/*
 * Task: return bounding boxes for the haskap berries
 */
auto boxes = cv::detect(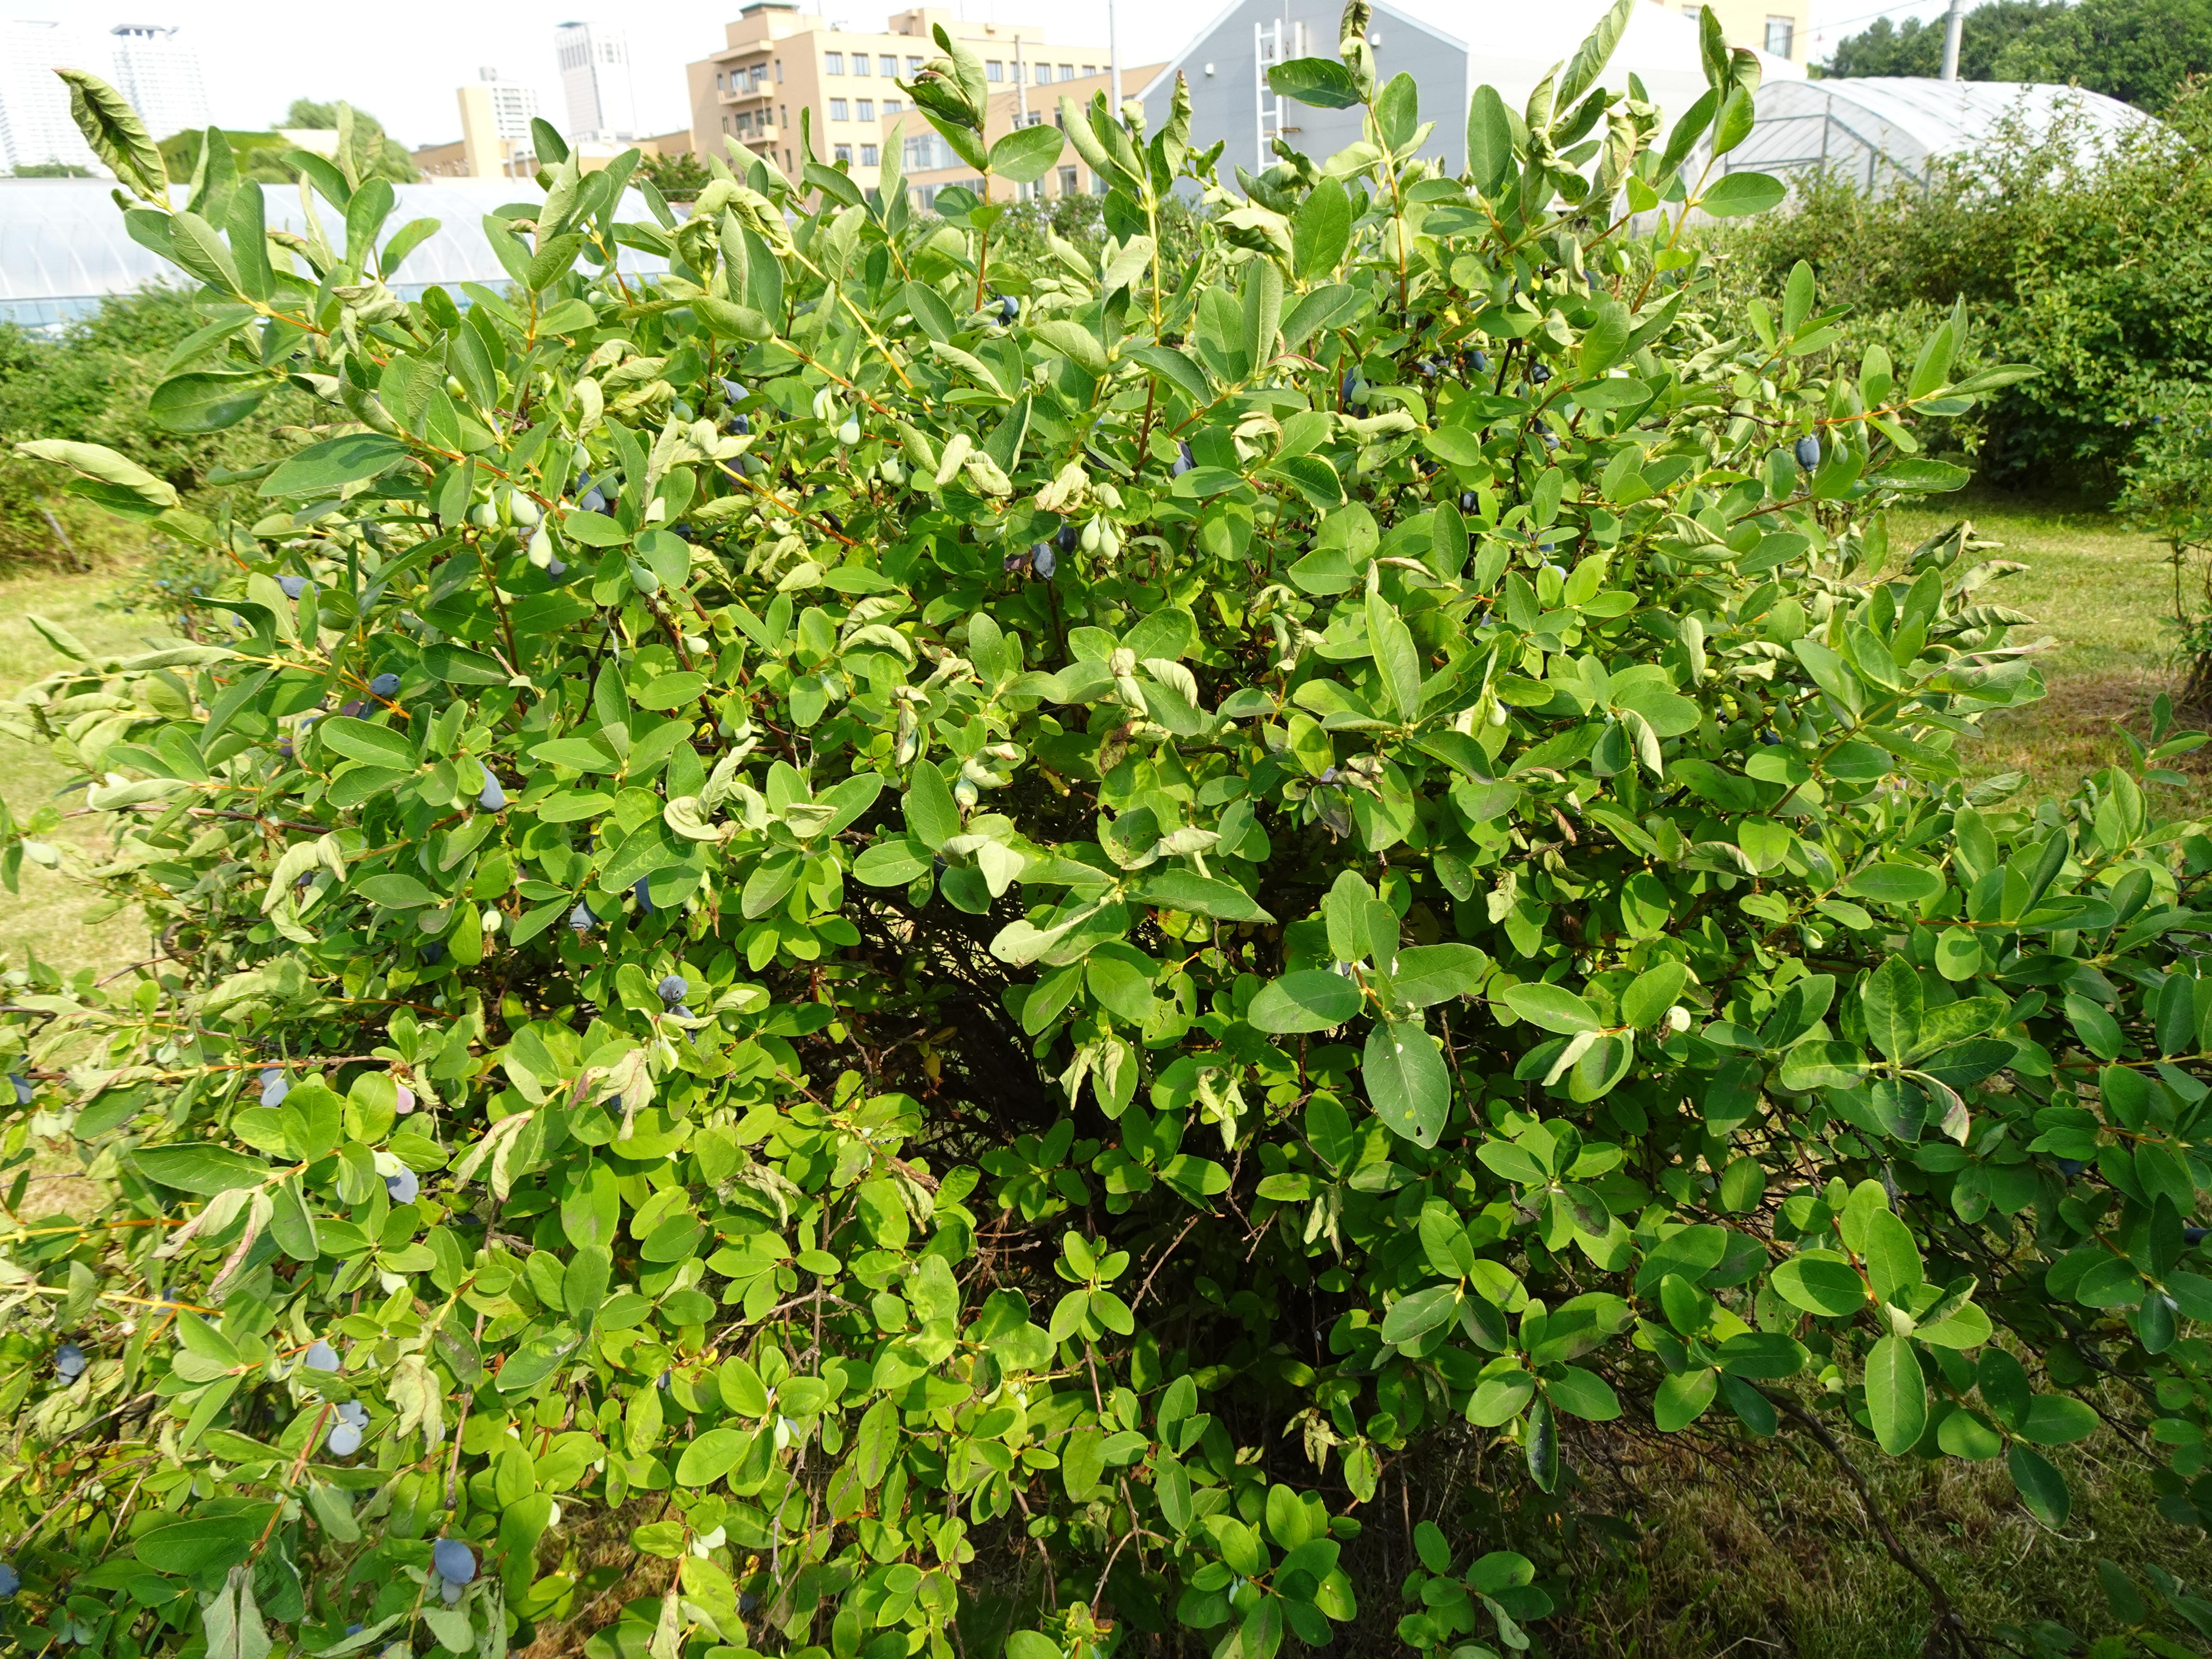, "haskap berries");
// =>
[1772,698,1792,730]
[900,728,919,764]
[730,415,750,436]
[742,450,763,474]
[988,318,1000,328]
[9,1073,36,1105]
[448,376,466,398]
[1532,363,1548,384]
[574,473,604,512]
[611,1094,623,1113]
[150,1287,180,1316]
[1350,376,1371,406]
[633,880,655,913]
[772,1414,793,1448]
[508,489,540,524]
[1533,418,1560,451]
[1004,553,1026,572]
[59,1107,73,1131]
[392,1083,418,1116]
[1796,434,1821,471]
[74,1478,89,1498]
[813,385,832,420]
[549,1501,561,1526]
[1803,928,1823,948]
[59,1372,72,1386]
[567,903,594,935]
[1173,441,1192,476]
[1666,1004,1690,1034]
[91,1478,105,1501]
[431,995,446,1007]
[399,612,420,629]
[262,1076,293,1112]
[722,455,746,485]
[1420,362,1437,378]
[358,701,384,722]
[1031,542,1059,585]
[74,1614,94,1645]
[1308,535,1319,549]
[1115,524,1125,544]
[880,446,902,482]
[1319,766,1342,793]
[472,489,501,536]
[39,1103,62,1138]
[1016,1383,1028,1411]
[1475,613,1490,646]
[1462,343,1486,372]
[691,1538,710,1561]
[1552,542,1556,553]
[735,718,751,739]
[259,1059,285,1088]
[954,772,978,806]
[383,1164,421,1207]
[298,871,314,888]
[1343,369,1356,400]
[659,976,691,1002]
[1100,518,1122,563]
[550,554,566,577]
[380,1272,407,1297]
[593,1455,609,1473]
[1459,491,1478,513]
[366,672,402,696]
[994,404,1010,419]
[892,455,907,486]
[673,396,695,425]
[574,444,591,470]
[306,1341,342,1371]
[1,1559,22,1599]
[657,1372,672,1389]
[344,1625,363,1637]
[628,559,660,595]
[700,1525,729,1550]
[1617,250,1630,272]
[867,465,876,480]
[838,412,861,445]
[155,1040,178,1063]
[669,1006,698,1031]
[1390,280,1408,298]
[434,1539,477,1582]
[30,1113,41,1136]
[253,316,271,335]
[1001,292,1019,316]
[277,739,295,759]
[1057,525,1075,556]
[1796,713,1818,750]
[684,634,709,653]
[474,764,507,811]
[1414,452,1437,474]
[277,576,323,600]
[340,699,360,717]
[331,1399,368,1428]
[672,523,694,544]
[507,1427,522,1442]
[300,718,314,730]
[721,378,747,405]
[718,719,733,738]
[58,1616,74,1643]
[1092,457,1111,468]
[783,1418,800,1437]
[1094,419,1103,427]
[1546,566,1569,582]
[54,1345,85,1377]
[1429,351,1450,366]
[1081,517,1101,554]
[328,1422,361,1458]
[373,1152,401,1177]
[442,1578,465,1603]
[977,420,991,430]
[529,511,551,566]
[1761,729,1777,747]
[1487,700,1506,726]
